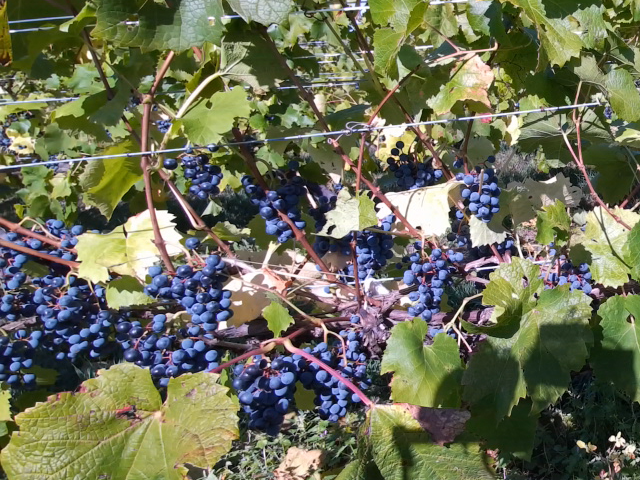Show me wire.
<instances>
[{"mask_svg":"<svg viewBox=\"0 0 640 480\" xmlns=\"http://www.w3.org/2000/svg\"><path fill=\"white\" fill-rule=\"evenodd\" d=\"M600 102H581L572 105H563V106H548V107H540L535 109H523L518 111H503L499 113L493 114H482L470 117H462V118H447V119H433L429 121H417V122H400L397 124L378 126L375 125L373 127L367 128H354V129H339L335 131H319L312 133H301L294 135H285V136H268V137H258L250 140H224V141H216L201 145H190V146H172L161 149H152V150H144V151H125V152H113L103 155L91 156V157H65L55 160H44L38 162H26L22 164H5L0 165V171L8 170V169H25L28 167H40L46 165H57L63 164L67 162H93L99 160H106L115 157H127V156H147V155H155V154H163L175 151H193V150H203L207 148H213L218 146H226V145H252L260 142H271V141H287V140H296L303 138H314V137H322V136H337L342 134H356V133H370L375 131H387L393 129H399L402 127H420V126H431L435 124H450V123H464V122H472L479 121L484 119H496L502 118L505 116H520V115H530L537 114L543 112L550 111H566V110H574L583 107H600Z\"/></svg>","mask_w":640,"mask_h":480,"instance_id":"obj_1","label":"wire"},{"mask_svg":"<svg viewBox=\"0 0 640 480\" xmlns=\"http://www.w3.org/2000/svg\"><path fill=\"white\" fill-rule=\"evenodd\" d=\"M73 14H62V15H54V16H38L34 18H20L13 19L9 21L10 25L15 24H23V23H36L41 21H56V20H64V19H73Z\"/></svg>","mask_w":640,"mask_h":480,"instance_id":"obj_2","label":"wire"},{"mask_svg":"<svg viewBox=\"0 0 640 480\" xmlns=\"http://www.w3.org/2000/svg\"><path fill=\"white\" fill-rule=\"evenodd\" d=\"M54 25H45L42 27H26V28H18V29H10L9 34H20V33H28V32H44L47 30H54Z\"/></svg>","mask_w":640,"mask_h":480,"instance_id":"obj_3","label":"wire"},{"mask_svg":"<svg viewBox=\"0 0 640 480\" xmlns=\"http://www.w3.org/2000/svg\"><path fill=\"white\" fill-rule=\"evenodd\" d=\"M402 280V276L398 275V276H388V277H383V278H373L370 280H361L360 284L361 285H372L375 283H385V282H390V281H401Z\"/></svg>","mask_w":640,"mask_h":480,"instance_id":"obj_4","label":"wire"},{"mask_svg":"<svg viewBox=\"0 0 640 480\" xmlns=\"http://www.w3.org/2000/svg\"><path fill=\"white\" fill-rule=\"evenodd\" d=\"M497 268H498V265L494 264V265H486V266L465 268L464 272L465 273H474V272H481V271H488V270H496Z\"/></svg>","mask_w":640,"mask_h":480,"instance_id":"obj_5","label":"wire"}]
</instances>
